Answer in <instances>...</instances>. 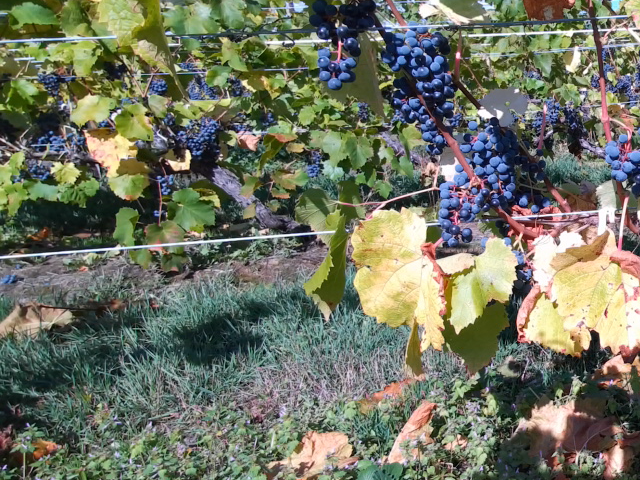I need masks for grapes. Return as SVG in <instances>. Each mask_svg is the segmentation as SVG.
<instances>
[{"label": "grapes", "instance_id": "1", "mask_svg": "<svg viewBox=\"0 0 640 480\" xmlns=\"http://www.w3.org/2000/svg\"><path fill=\"white\" fill-rule=\"evenodd\" d=\"M416 32L425 34L429 32V28L407 31L404 35L392 31L385 32L383 39L389 44L380 57L393 72L404 67L413 78H418L413 85L405 76L394 81V87L399 90L394 92L392 106L401 110L407 123H415L418 120L424 131L422 139L426 143L435 144V147L428 144L425 150L433 155H441L449 143L436 129L416 94H422L434 115L442 121L444 117L454 116V102L447 99H454L459 88L450 84L451 75L447 73L449 64L446 56L451 53L447 38L440 31H434L430 39L419 40L416 38Z\"/></svg>", "mask_w": 640, "mask_h": 480}, {"label": "grapes", "instance_id": "2", "mask_svg": "<svg viewBox=\"0 0 640 480\" xmlns=\"http://www.w3.org/2000/svg\"><path fill=\"white\" fill-rule=\"evenodd\" d=\"M499 119L492 117L490 122L484 125V132H480L476 136V141L471 142L474 136L465 133L462 136L460 148L463 154L471 153V158L465 157L476 176L479 179H486L490 183L493 191L500 189L501 184L502 195L492 193L487 188L471 187L470 193L476 195L472 199L462 198V208L458 213V217L464 223H470L479 212H488L490 205L498 206L501 210H506L508 204L513 206L519 205L522 209H527L532 202V190L529 187L521 186L517 189L516 181V165H522L523 172L536 173V178L544 180L546 172H538L539 168L546 166L544 160H539L536 164L529 163L525 158L516 156L520 147L518 136L512 130L505 133L500 129Z\"/></svg>", "mask_w": 640, "mask_h": 480}, {"label": "grapes", "instance_id": "7", "mask_svg": "<svg viewBox=\"0 0 640 480\" xmlns=\"http://www.w3.org/2000/svg\"><path fill=\"white\" fill-rule=\"evenodd\" d=\"M512 254H513V255H515V257H516V261H517V263H518L519 265H524V264H525V261H524V255H523V253H522V252H520V251H519V250H517V249H513V250H512Z\"/></svg>", "mask_w": 640, "mask_h": 480}, {"label": "grapes", "instance_id": "6", "mask_svg": "<svg viewBox=\"0 0 640 480\" xmlns=\"http://www.w3.org/2000/svg\"><path fill=\"white\" fill-rule=\"evenodd\" d=\"M533 205L530 207L532 213H539L541 209L549 207L551 200L547 196H543L539 190L533 192Z\"/></svg>", "mask_w": 640, "mask_h": 480}, {"label": "grapes", "instance_id": "5", "mask_svg": "<svg viewBox=\"0 0 640 480\" xmlns=\"http://www.w3.org/2000/svg\"><path fill=\"white\" fill-rule=\"evenodd\" d=\"M628 142L627 135H619L618 140L608 141L604 147L605 162L612 168L611 180L623 183L627 180V175L636 182L632 187V193L636 198H640V150L628 151L624 162L617 160L620 153L621 144Z\"/></svg>", "mask_w": 640, "mask_h": 480}, {"label": "grapes", "instance_id": "3", "mask_svg": "<svg viewBox=\"0 0 640 480\" xmlns=\"http://www.w3.org/2000/svg\"><path fill=\"white\" fill-rule=\"evenodd\" d=\"M311 9L315 13L309 18V24L313 28H317L316 34L320 40H329L332 36L334 46L338 45V39L343 41V48L349 51L352 57H342L341 59L331 60L332 51L330 48H319L317 50V67L319 69L318 78L320 81H327V89L331 91H340L342 83H354L356 81L355 73L352 69L358 66V62L354 57L361 55V49L358 47V34H364L366 29L375 24V21L367 16L368 11L376 9V3L372 0H365L362 3L342 4L339 12L345 16L343 25L336 28L328 17L336 16L338 9L334 5H327L323 0H317L311 5Z\"/></svg>", "mask_w": 640, "mask_h": 480}, {"label": "grapes", "instance_id": "4", "mask_svg": "<svg viewBox=\"0 0 640 480\" xmlns=\"http://www.w3.org/2000/svg\"><path fill=\"white\" fill-rule=\"evenodd\" d=\"M455 171L459 174H455L451 181L442 182L439 185V197L443 199L439 204V211L437 212V218L439 222V228L443 230L441 233V239L447 241V245L451 248H457L459 241L453 236H458L461 232V228L457 224H453L452 220L448 217L450 211L448 208H459L461 206V200L456 197V192L453 186L468 188L470 186V178L468 174L464 172V168L461 164L455 166Z\"/></svg>", "mask_w": 640, "mask_h": 480}]
</instances>
